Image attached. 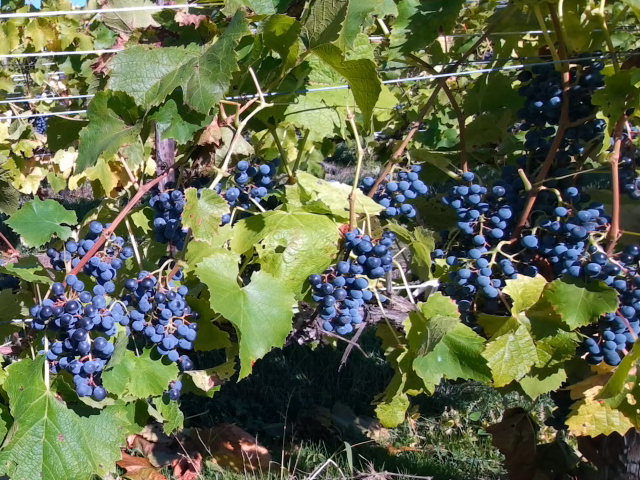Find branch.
<instances>
[{
  "instance_id": "branch-1",
  "label": "branch",
  "mask_w": 640,
  "mask_h": 480,
  "mask_svg": "<svg viewBox=\"0 0 640 480\" xmlns=\"http://www.w3.org/2000/svg\"><path fill=\"white\" fill-rule=\"evenodd\" d=\"M563 68V94L561 96V108L559 114V123L557 133L550 147L548 155L541 165L540 169L535 173L533 177L532 184L530 186V191L528 197L526 198V202L524 207L522 208L517 222L515 223V227L512 230V239L510 241L509 248L507 250V255L511 256L517 247L518 241L520 240V233L525 228L526 223L528 221L531 212L535 206V202L538 199L539 191L542 185V182L545 176L549 173L553 164L555 163L557 156L564 144V140L567 133L568 127V118L570 113V80H571V64L570 62H562Z\"/></svg>"
},
{
  "instance_id": "branch-2",
  "label": "branch",
  "mask_w": 640,
  "mask_h": 480,
  "mask_svg": "<svg viewBox=\"0 0 640 480\" xmlns=\"http://www.w3.org/2000/svg\"><path fill=\"white\" fill-rule=\"evenodd\" d=\"M624 133V122L617 120L615 122L614 134L612 136L610 155H609V168L611 179V194H612V214L611 224L608 231L607 243L605 250L607 252H613L617 243V235L620 229L621 218V190H620V175H619V152L621 140Z\"/></svg>"
},
{
  "instance_id": "branch-3",
  "label": "branch",
  "mask_w": 640,
  "mask_h": 480,
  "mask_svg": "<svg viewBox=\"0 0 640 480\" xmlns=\"http://www.w3.org/2000/svg\"><path fill=\"white\" fill-rule=\"evenodd\" d=\"M187 160V156L182 154L177 161L171 164L164 171L159 173L156 177L149 180L142 187H140L137 192L133 195L131 201L126 204L118 213L113 223L104 231V233L99 238L98 242L92 248V250L86 255V257L77 264L74 268L70 270L72 275H77L82 269H84L90 261L95 257V255L101 250L107 239L110 235L121 225L125 215L132 210L137 204L141 196L147 192L149 189L158 184L161 180L168 177L173 171L177 170L180 166H182Z\"/></svg>"
},
{
  "instance_id": "branch-4",
  "label": "branch",
  "mask_w": 640,
  "mask_h": 480,
  "mask_svg": "<svg viewBox=\"0 0 640 480\" xmlns=\"http://www.w3.org/2000/svg\"><path fill=\"white\" fill-rule=\"evenodd\" d=\"M447 82H448V78H441L437 83V86L432 90L430 95L427 97L425 103L423 104V108L421 112L419 113L418 117L414 121L413 125L409 128V131L404 135V137L399 142L398 146L396 147V150L394 151L393 155L389 160V163L387 164L386 169L370 187L367 193V197L369 199H372L375 196V193L378 190V188L390 176L406 144L409 142L412 136L416 133V130L420 127L421 123L425 120L426 115L428 114L433 101L438 96V94L444 89V86L446 85Z\"/></svg>"
},
{
  "instance_id": "branch-5",
  "label": "branch",
  "mask_w": 640,
  "mask_h": 480,
  "mask_svg": "<svg viewBox=\"0 0 640 480\" xmlns=\"http://www.w3.org/2000/svg\"><path fill=\"white\" fill-rule=\"evenodd\" d=\"M287 105V102L285 100H281V101H272L269 103H263L260 104L258 106H256L255 108H253L244 118H242L239 122V124L237 125V127L234 129L231 138L229 140L228 143V147L226 150V155L224 158V162L222 163L220 169L218 170V173L216 175V177L211 181L209 188L211 190H214L217 185L222 181L223 177L225 176V173L227 172L230 164H231V160L233 157V152L235 149V145L236 142L238 140V137L241 133V131L244 129V127L246 126V124H248L251 119L256 116L257 114H259L262 111L265 110H271L274 108H283Z\"/></svg>"
},
{
  "instance_id": "branch-6",
  "label": "branch",
  "mask_w": 640,
  "mask_h": 480,
  "mask_svg": "<svg viewBox=\"0 0 640 480\" xmlns=\"http://www.w3.org/2000/svg\"><path fill=\"white\" fill-rule=\"evenodd\" d=\"M347 118H348V121H349V124H350L352 135L354 137L355 145L358 148L357 149V152H358L357 167H356L355 174H354V177H353V181H352V184H351V189L349 190L348 226H349L350 229H353L354 228V223H353V219H354V193L356 191V186L358 184V179L360 177V172L362 170L364 147L360 143L359 134L357 132L353 116L351 114H348Z\"/></svg>"
},
{
  "instance_id": "branch-7",
  "label": "branch",
  "mask_w": 640,
  "mask_h": 480,
  "mask_svg": "<svg viewBox=\"0 0 640 480\" xmlns=\"http://www.w3.org/2000/svg\"><path fill=\"white\" fill-rule=\"evenodd\" d=\"M491 33V30L489 28H486V31L481 34V36L476 39V41L470 45V47L456 60V62L454 63L453 67L448 70L449 72H455L456 69L458 68V66L470 55L472 54L475 49L483 42L484 38L486 36H488Z\"/></svg>"
},
{
  "instance_id": "branch-8",
  "label": "branch",
  "mask_w": 640,
  "mask_h": 480,
  "mask_svg": "<svg viewBox=\"0 0 640 480\" xmlns=\"http://www.w3.org/2000/svg\"><path fill=\"white\" fill-rule=\"evenodd\" d=\"M185 257H186V253L184 251H181L178 254V258H177V261H176L175 265L173 266V268H171L166 273V278L168 280H171L173 278V276L179 272V270L181 269V267L184 264Z\"/></svg>"
}]
</instances>
